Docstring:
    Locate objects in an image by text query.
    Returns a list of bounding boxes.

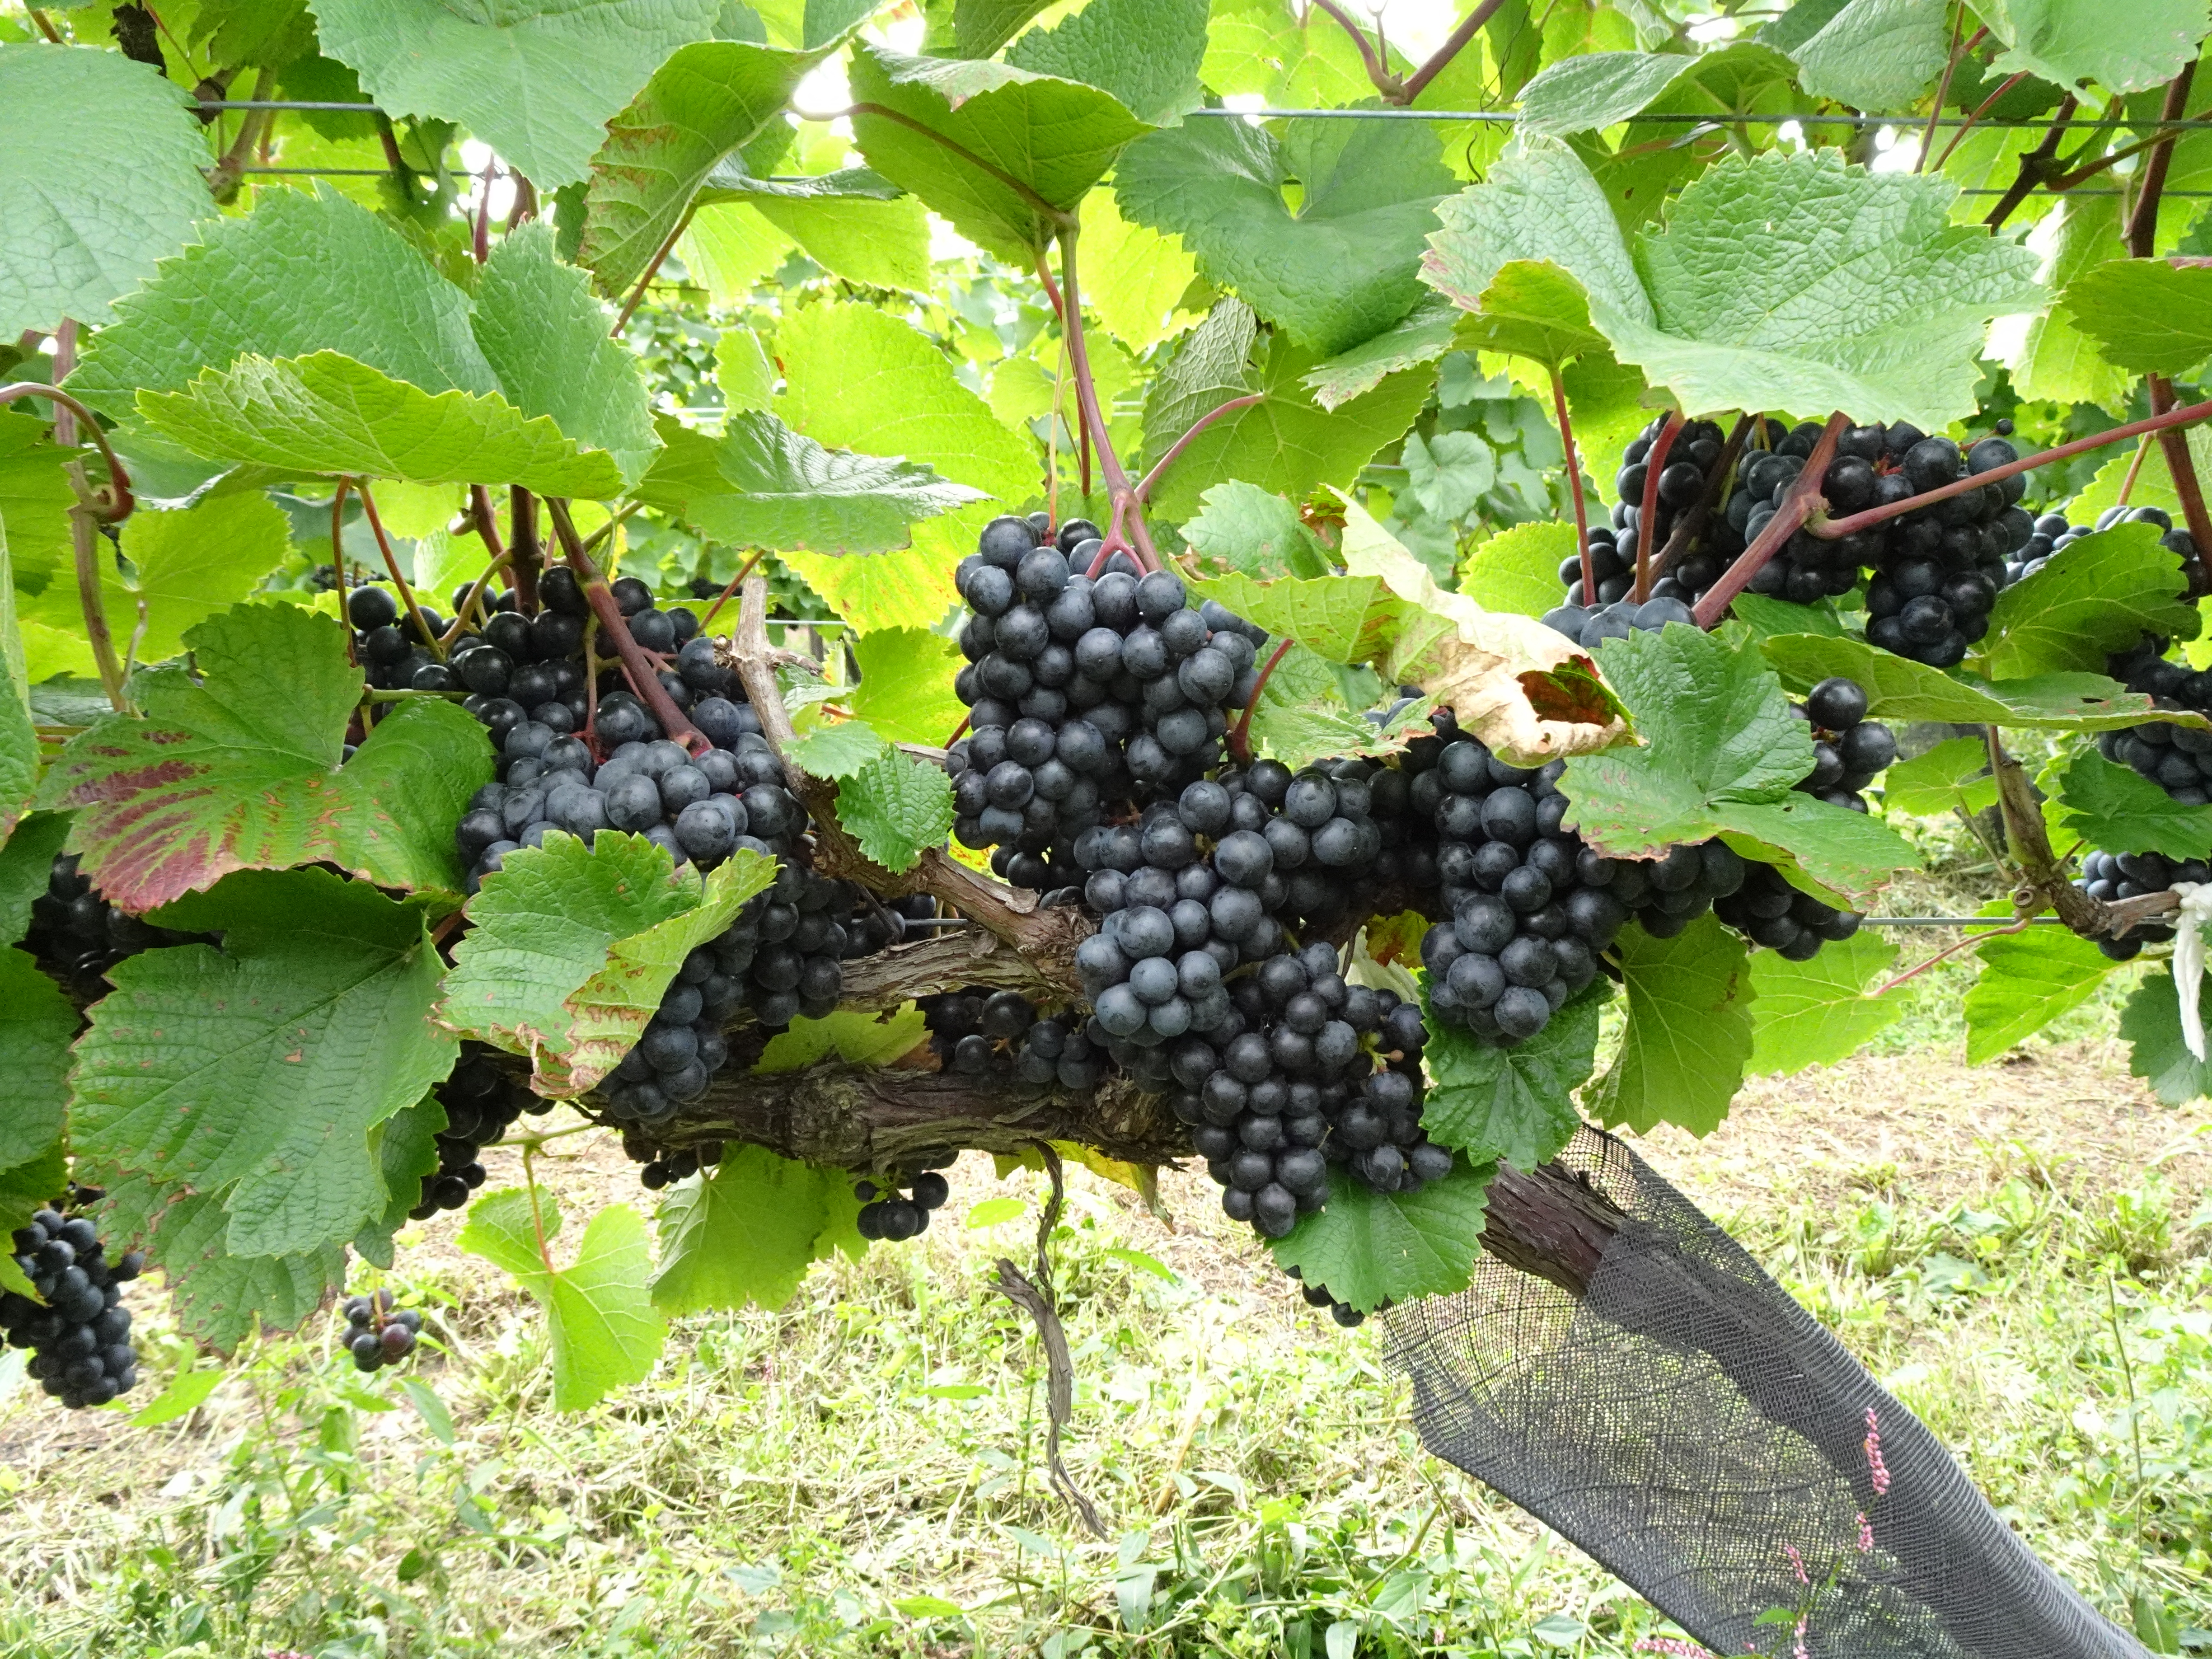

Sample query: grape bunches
[19,858,229,1004]
[2006,506,2208,665]
[1074,780,1291,1045]
[991,829,1089,906]
[1865,438,2034,670]
[2098,654,2212,807]
[1411,716,1649,1048]
[1996,418,2014,435]
[2071,848,2208,962]
[854,1163,949,1241]
[947,512,1150,850]
[1613,411,1732,625]
[0,1178,150,1409]
[339,580,524,716]
[1285,1265,1394,1328]
[1620,835,1745,939]
[414,569,698,753]
[840,887,955,961]
[454,638,808,1138]
[1367,735,1446,890]
[341,1286,422,1372]
[1712,675,1896,964]
[623,1133,725,1190]
[1539,598,1696,649]
[1012,1014,1102,1100]
[408,1039,556,1219]
[1215,759,1383,933]
[917,985,1033,1075]
[1122,569,1270,787]
[1322,983,1451,1189]
[1726,418,1889,606]
[738,838,858,1027]
[1559,526,1635,611]
[1087,940,1380,1238]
